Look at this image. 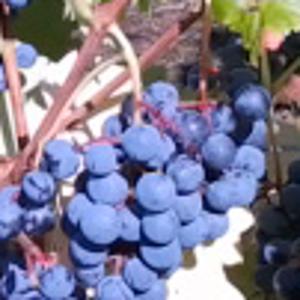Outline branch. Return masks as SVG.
Masks as SVG:
<instances>
[{"label": "branch", "mask_w": 300, "mask_h": 300, "mask_svg": "<svg viewBox=\"0 0 300 300\" xmlns=\"http://www.w3.org/2000/svg\"><path fill=\"white\" fill-rule=\"evenodd\" d=\"M131 6V0L105 1L102 9L94 18V26L87 40L75 53L56 93L44 108L37 123L29 133L28 122L20 99L13 46L6 20L7 3L4 0H0V46L4 62L7 93L17 126L18 142L22 145L16 158L10 164L0 168L1 184H10L25 175L34 163L39 150L47 138L54 139L66 129L92 116L113 92L129 80V70L124 68L118 77L104 86L87 102L86 108L55 125L73 98L89 64L97 57L107 38L112 35L116 20L127 14Z\"/></svg>", "instance_id": "branch-1"}, {"label": "branch", "mask_w": 300, "mask_h": 300, "mask_svg": "<svg viewBox=\"0 0 300 300\" xmlns=\"http://www.w3.org/2000/svg\"><path fill=\"white\" fill-rule=\"evenodd\" d=\"M210 14L209 4L206 1L199 2L192 11L184 14L177 23H172L159 35L150 48L139 58L140 67L146 68L172 38L175 36L182 37L185 31L191 32Z\"/></svg>", "instance_id": "branch-2"}]
</instances>
